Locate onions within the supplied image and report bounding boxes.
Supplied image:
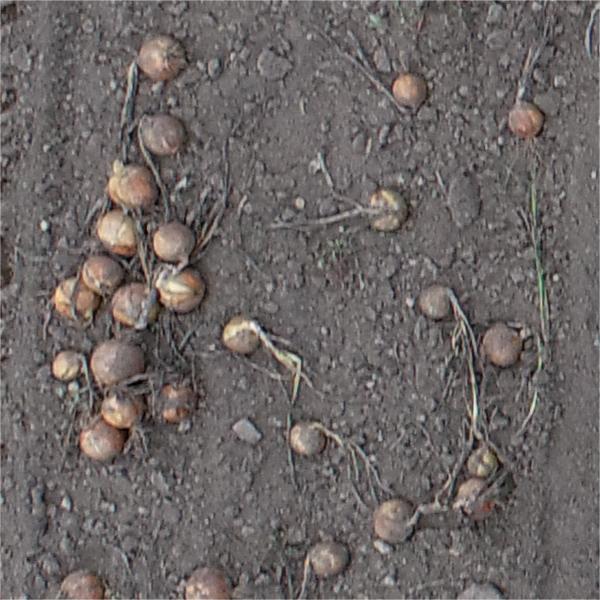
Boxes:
[62,568,103,599]
[151,221,191,259]
[506,101,543,137]
[374,497,414,541]
[466,448,497,477]
[416,284,453,318]
[135,34,185,83]
[108,284,156,329]
[455,476,496,518]
[184,566,232,599]
[221,316,258,354]
[109,165,155,210]
[158,267,203,310]
[82,253,125,294]
[100,390,138,425]
[138,114,184,155]
[92,337,143,383]
[97,211,138,252]
[288,419,325,456]
[480,326,519,366]
[81,418,125,460]
[48,278,85,315]
[307,537,348,576]
[49,349,82,381]
[366,185,406,231]
[387,72,424,110]
[151,381,196,425]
